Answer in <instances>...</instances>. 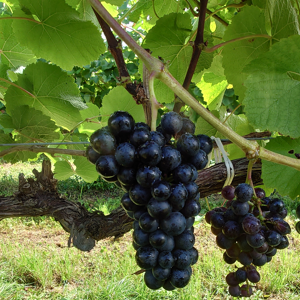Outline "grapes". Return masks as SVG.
<instances>
[{
  "instance_id": "1",
  "label": "grapes",
  "mask_w": 300,
  "mask_h": 300,
  "mask_svg": "<svg viewBox=\"0 0 300 300\" xmlns=\"http://www.w3.org/2000/svg\"><path fill=\"white\" fill-rule=\"evenodd\" d=\"M176 111L156 131L118 110L90 138L86 157L108 183L123 188L121 208L134 219L135 261L151 290L182 288L198 260L195 216L201 211L198 170L208 164L212 139Z\"/></svg>"
},
{
  "instance_id": "2",
  "label": "grapes",
  "mask_w": 300,
  "mask_h": 300,
  "mask_svg": "<svg viewBox=\"0 0 300 300\" xmlns=\"http://www.w3.org/2000/svg\"><path fill=\"white\" fill-rule=\"evenodd\" d=\"M221 195L227 200L225 207H215L205 214V221L211 225L216 244L223 250L227 264L238 261L242 268L226 276L229 294L236 298L250 297L252 288L243 284L260 281V274L254 266H263L272 260L277 250L289 246L285 235L291 233L290 225L284 221L287 209L282 199L266 197L261 187L239 183L236 187L226 185Z\"/></svg>"
}]
</instances>
